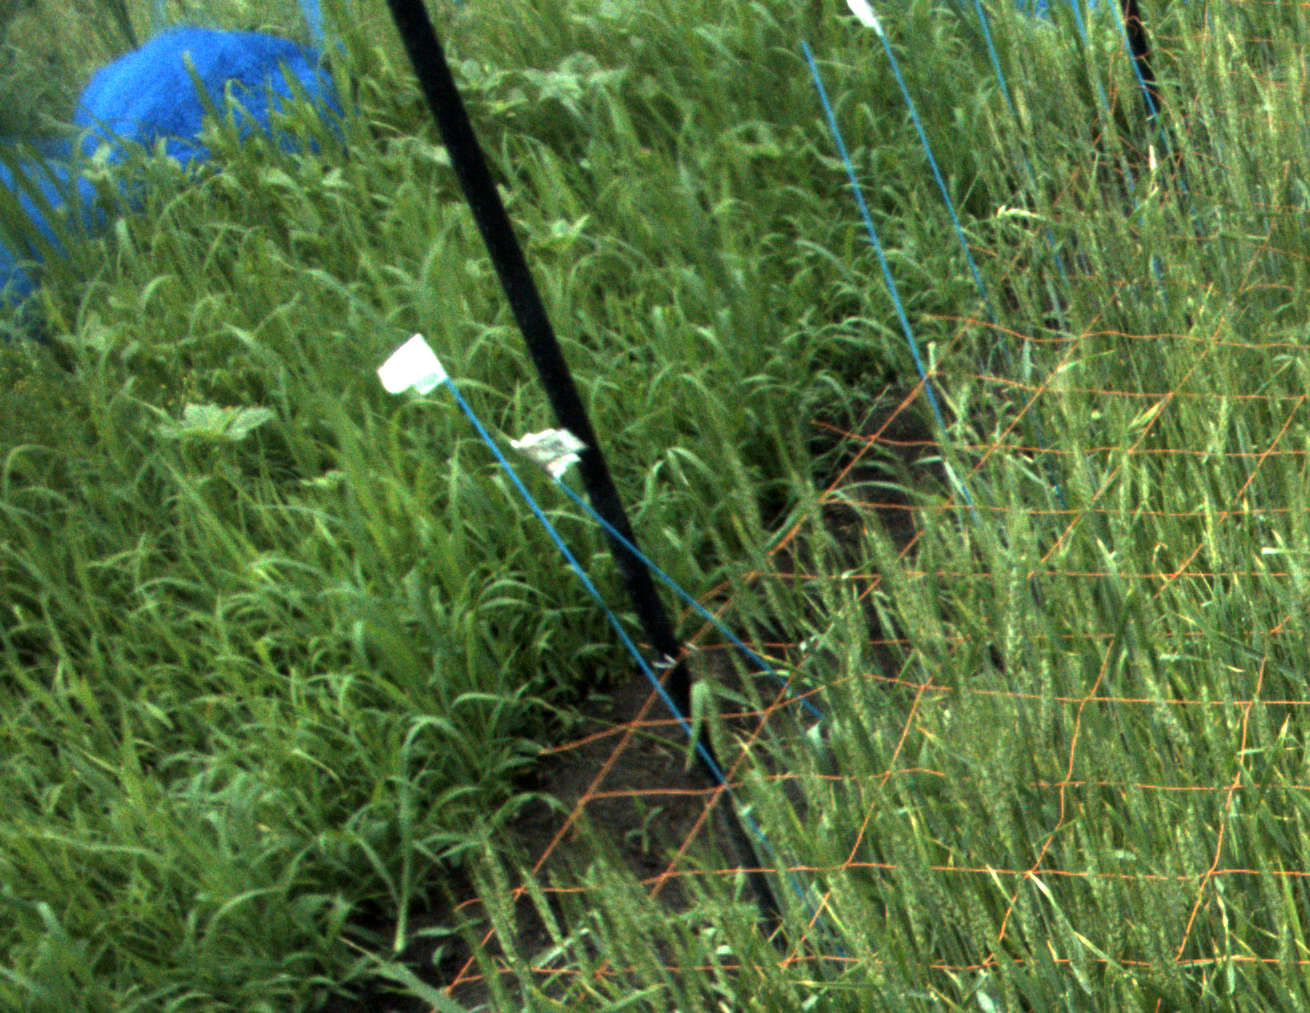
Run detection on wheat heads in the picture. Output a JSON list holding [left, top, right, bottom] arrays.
[[681, 962, 706, 1012], [726, 643, 764, 708], [1083, 725, 1121, 785], [887, 761, 914, 810], [524, 984, 564, 1013], [474, 873, 519, 965], [964, 888, 986, 957], [843, 774, 866, 831], [1212, 463, 1233, 502], [710, 524, 768, 622], [1071, 437, 1095, 511], [1146, 591, 1170, 647], [488, 970, 525, 1013], [1213, 652, 1240, 732], [918, 510, 947, 562], [1165, 317, 1191, 358], [1035, 660, 1055, 748], [1142, 500, 1163, 542], [1005, 918, 1036, 970], [893, 832, 973, 935], [1074, 822, 1104, 901], [1304, 432, 1310, 489], [788, 468, 811, 512], [1114, 751, 1151, 815], [977, 767, 1017, 850], [1056, 72, 1086, 125], [1137, 463, 1150, 500], [1079, 44, 1105, 109], [856, 937, 892, 992], [567, 923, 592, 987], [1081, 223, 1104, 283], [591, 905, 628, 984], [1285, 469, 1307, 526], [1289, 62, 1304, 120], [482, 844, 519, 929], [1051, 552, 1069, 614], [807, 752, 821, 833], [791, 743, 822, 810], [1285, 578, 1307, 640], [991, 157, 1015, 205], [968, 148, 1000, 204], [682, 871, 724, 929], [802, 476, 825, 555], [812, 550, 839, 615], [1174, 821, 1200, 898], [849, 581, 874, 648], [1009, 266, 1039, 324], [844, 649, 875, 735], [981, 108, 1008, 162], [988, 278, 1015, 347], [616, 942, 664, 1013], [864, 526, 934, 630], [1216, 395, 1232, 443], [881, 945, 910, 994], [1105, 879, 1123, 970], [1163, 850, 1189, 927], [1207, 420, 1224, 460], [1030, 552, 1056, 600], [1201, 530, 1223, 568], [700, 931, 736, 1004], [1213, 784, 1230, 812], [990, 459, 1006, 510], [1024, 702, 1040, 742], [1150, 791, 1181, 850], [1256, 702, 1273, 760], [1001, 964, 1025, 1013], [1206, 341, 1231, 394], [701, 680, 731, 769], [1191, 356, 1214, 411], [706, 873, 751, 935], [1095, 122, 1121, 195], [1013, 872, 1043, 946], [1184, 797, 1210, 870], [706, 901, 760, 920], [1201, 683, 1233, 783], [1172, 117, 1203, 184], [1214, 53, 1241, 144], [1279, 920, 1291, 991], [1182, 54, 1215, 108], [1041, 978, 1072, 1013], [1074, 575, 1102, 634], [728, 459, 764, 542], [599, 857, 624, 916], [767, 785, 798, 851], [520, 864, 567, 948], [955, 668, 982, 729], [973, 891, 1008, 964], [1303, 533, 1310, 633], [1300, 726, 1310, 792], [826, 870, 866, 940], [1015, 83, 1037, 142], [761, 578, 796, 638], [990, 721, 1029, 784], [1004, 452, 1022, 496], [872, 989, 909, 1013], [1186, 459, 1210, 497], [777, 854, 820, 946], [1201, 152, 1220, 200], [956, 383, 972, 440], [1074, 894, 1100, 991], [1255, 102, 1283, 143], [1105, 516, 1132, 581], [613, 867, 652, 936], [1000, 565, 1024, 674], [1034, 172, 1049, 220], [942, 748, 987, 830], [1267, 175, 1287, 214], [900, 872, 928, 954], [836, 586, 863, 661], [839, 870, 880, 942], [1135, 872, 1162, 926], [1119, 452, 1131, 493], [937, 522, 971, 576], [1118, 483, 1127, 519], [795, 949, 813, 990], [1155, 336, 1175, 376], [1124, 994, 1159, 1013], [1157, 925, 1186, 998], [1082, 754, 1107, 823], [1139, 922, 1176, 997], [1196, 90, 1218, 133], [744, 773, 785, 847], [727, 596, 761, 647], [759, 948, 802, 1013], [1125, 1004, 1142, 1013], [1054, 912, 1085, 971], [994, 110, 1035, 190], [1143, 677, 1195, 761], [623, 868, 685, 954], [1259, 856, 1288, 932], [1138, 601, 1160, 648], [1228, 149, 1254, 219], [1114, 58, 1132, 119], [1290, 528, 1305, 565], [1025, 261, 1044, 319], [957, 298, 979, 341], [1158, 591, 1184, 647]]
